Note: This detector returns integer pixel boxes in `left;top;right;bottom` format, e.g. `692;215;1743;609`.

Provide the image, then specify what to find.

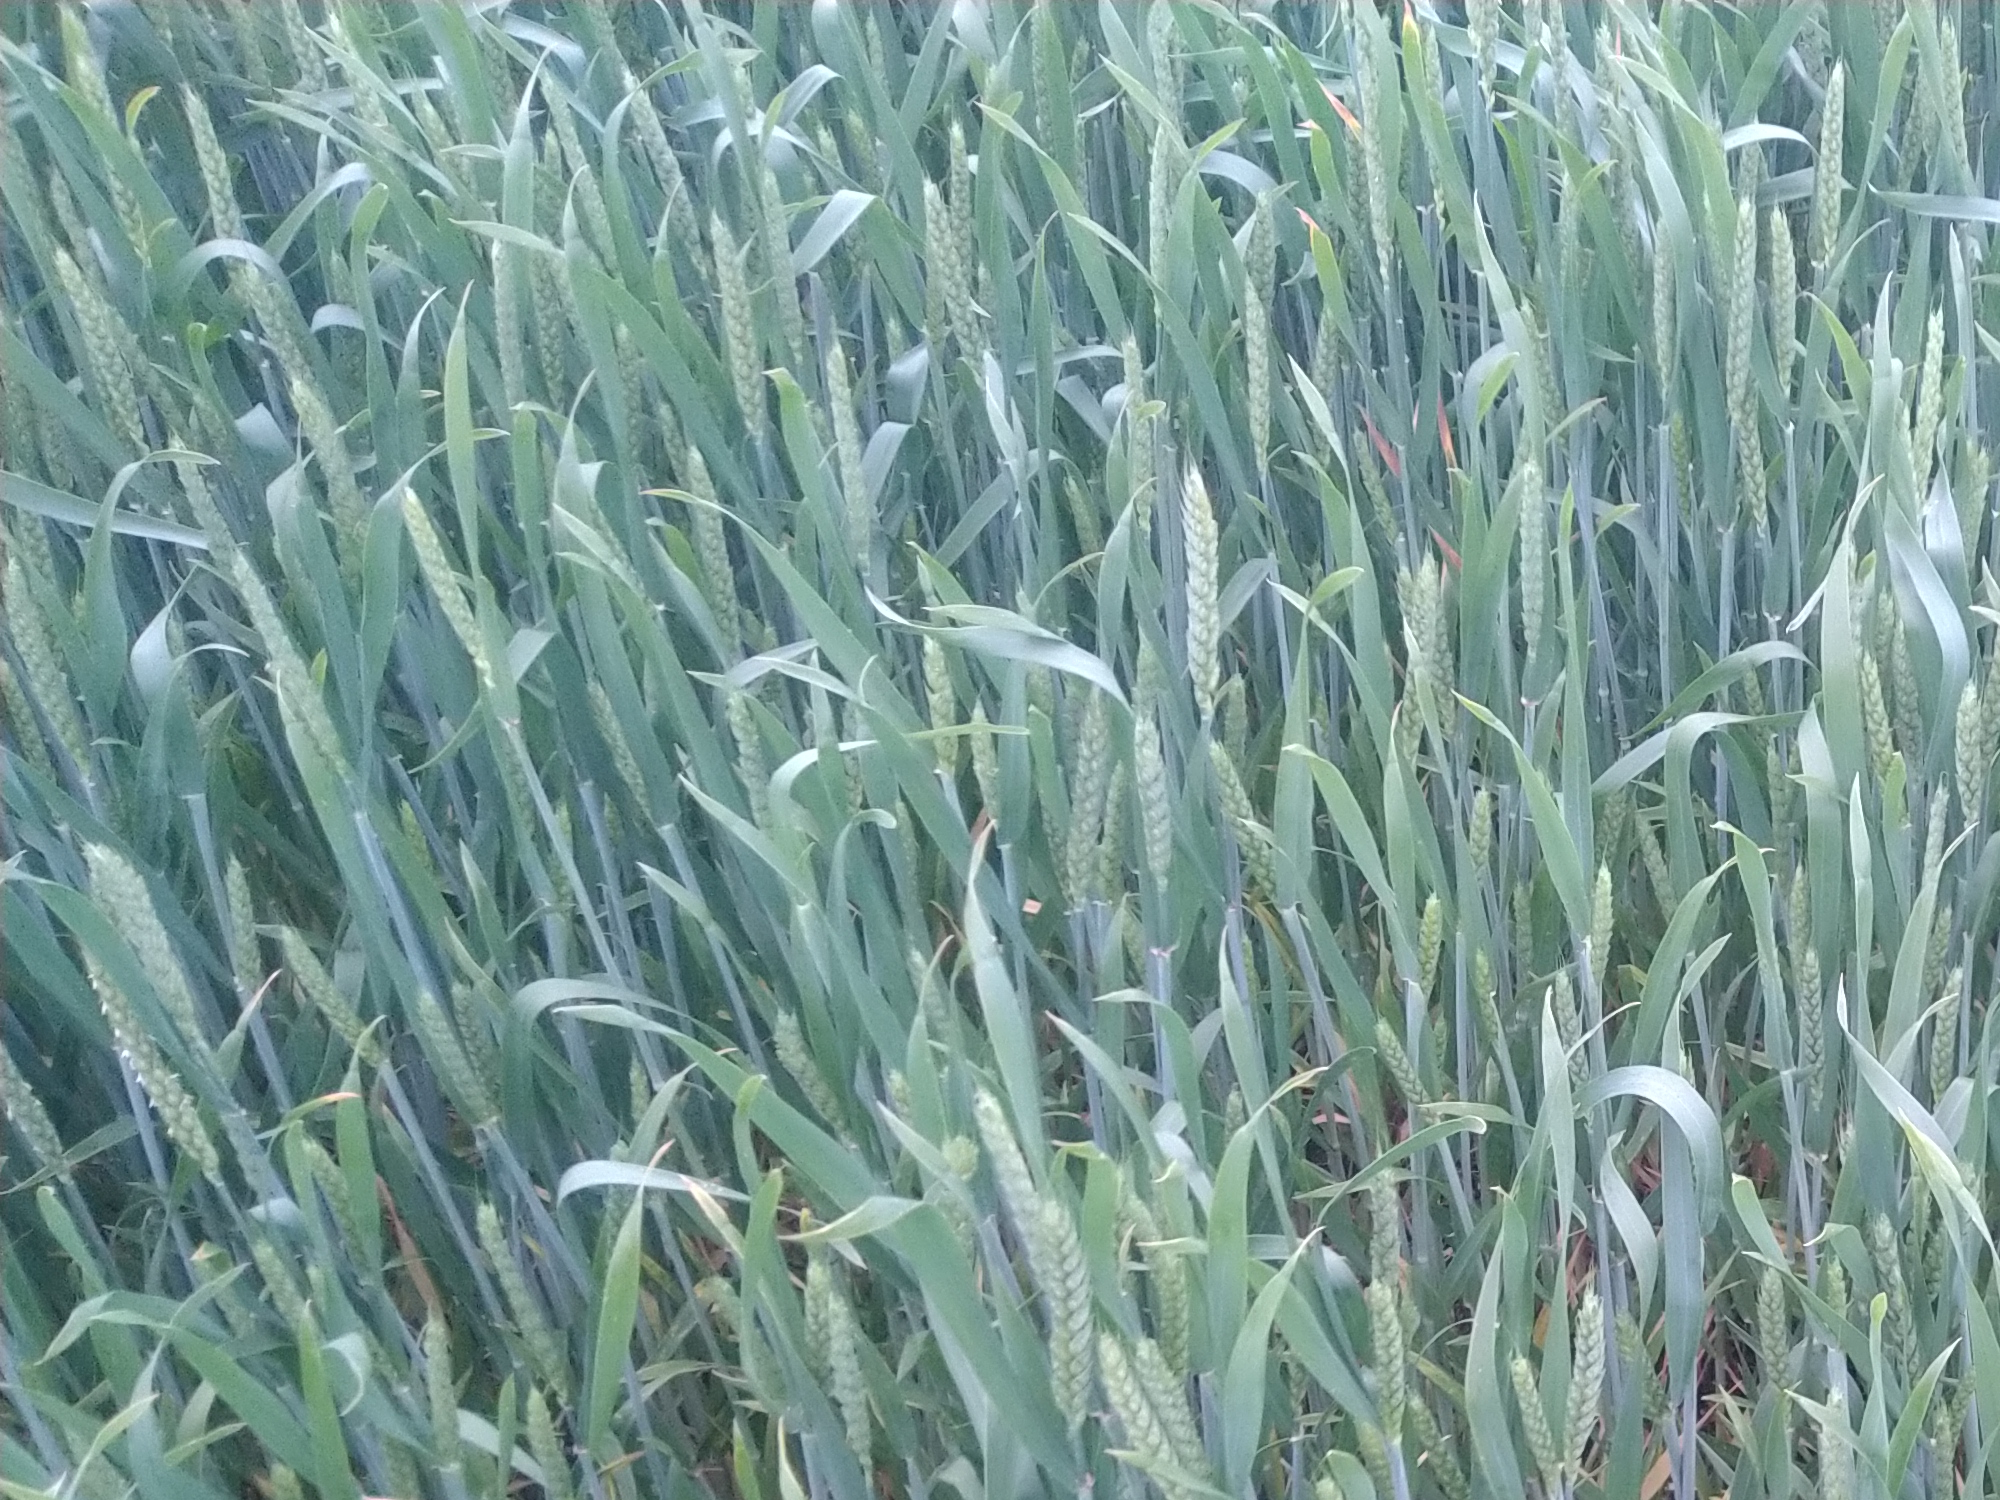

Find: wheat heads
1102;761;1126;899
52;169;102;286
1398;105;1412;195
1956;683;1982;823
400;491;488;666
3;563;90;765
604;794;623;846
1877;1;1901;56
1564;1294;1606;1473
729;694;773;831
1932;970;1962;1103
1768;742;1791;889
17;505;62;667
1788;874;1810;973
1124;342;1153;529
1821;1394;1849;1500
1151;26;1179;129
925;270;947;362
609;2;653;76
736;163;764;261
772;1011;853;1141
1433;1016;1446;1081
702;1280;742;1334
502;725;537;834
865;12;889;98
330;20;401;149
169;436;236;576
1862;654;1892;779
1739;386;1766;519
186;89;247;275
1923;908;1952;1001
168;620;199;717
1771;209;1796;388
1800;949;1826;1105
1031;10;1056;156
1419;896;1442;994
978;264;1002;351
762;169;804;357
1738;140;1758;199
74;1439;167;1500
1704;194;1728;303
194;1255;255;1339
548;250;593;353
1596;790;1628;866
481;26;518;123
1613;153;1643;287
1471;790;1490;874
494;242;524;405
304;1143;368;1269
1357;1422;1395;1500
1524;308;1569;440
384;1439;425;1500
1965;449;1989;572
1616;1314;1671;1416
598;1148;631;1260
423;1318;463;1463
278;2;328;94
1401;671;1422;759
949;124;974;286
538;132;565;236
625;88;709;275
331;252;362;362
1134;717;1172;883
1251;193;1276;307
804;1264;832;1374
818;126;844;188
1424;26;1445;214
252;1242;309;1331
526;1387;576;1500
1594;32;1614;127
630;1060;651;1128
1924;786;1949;886
73;59;119;129
1245;277;1270;455
529;249;567;406
847;113;882;192
2;371;43;477
1225;1089;1245;1143
616;326;644;460
542;75;622;274
687;447;740;653
1315;310;1338;398
225;875;263;992
1827;1258;1846;1321
1925;1220;1946;1296
924;637;957;768
1759;1268;1791;1390
475;1207;572;1402
1044;1204;1094;1418
1515;882;1533;984
1671;414;1692;520
1591;867;1613;985
1134;639;1157;720
54;254;147;443
548;806;575;909
895;800;920;891
401;801;431;870
0;101;44;217
416;992;492;1120
103;159;151;260
1241;934;1257;997
588;684;650;813
1430;566;1457;731
1072;40;1089;92
1554;973;1590;1094
1133;1340;1212;1481
1151;133;1169;287
1632;808;1678;922
39;401;76;489
1560;179;1575;287
418;103;477;194
1067;690;1112;900
232;550;343;753
1510;1357;1557;1480
761;625;787;715
272;282;320;361
1039;788;1070;899
1375;1021;1432;1114
1353;430;1397;539
1818;64;1844;251
1424;25;1442;108
104;305;192;440
1073;117;1088;205
282;926;379;1059
1522;0;1542;46
1948;1368;1976;1448
1897;403;1913;485
1934;1410;1954;1500
1548;0;1579;145
983;65;1000;111
1727;203;1755;412
0;1040;71;1175
83;849;202;1023
1208;745;1276;897
1121;911;1149;976
1851;559;1874;654
1369;1169;1401;1291
1875;591;1896;712
1748;143;1757;284
973;1092;1048;1285
272;1467;327;1500
1480;1;1500;75
1940;18;1965;157
288;381;364;547
925;187;985;379
1096;1338;1200;1500
1980;601;2000;762
589;500;649;608
842;705;865;815
451;985;504;1102
1028;666;1055;720
1356;31;1392;253
1475;950;1498;1041
843;220;870;268
827;348;870;567
1183;469;1221;704
1156;1249;1190;1376
1912;312;1945;498
1344;129;1370;292
1371;1283;1405;1438
584;1;628;89
1398;574;1431;658
85;961;219;1174
887;1074;919;1188
1893;621;1925;779
1225;676;1247;763
1408;1394;1471;1500
1426;134;1445;220
734;65;755;119
830;1292;871;1458
710;214;766;431
1114;1465;1141;1500
243;267;313;387
1;662;54;782
1064;478;1101;565
909;951;954;1052
1654;222;1674;384
936;1140;978;1260
227;1;272;93
1873;1216;1921;1382
1959;1161;1980;1208
659;403;687;488
888;317;906;363
1896;71;1926;190
1742;667;1768;746
72;593;87;640
193;389;238;461
1521;464;1544;653
972;704;1001;822
1412;558;1437;650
